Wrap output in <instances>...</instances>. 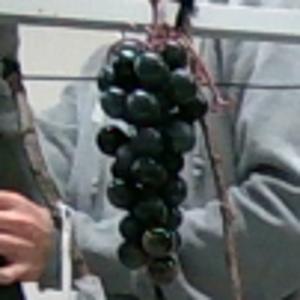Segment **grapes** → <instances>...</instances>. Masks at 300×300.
<instances>
[{"instance_id": "grapes-1", "label": "grapes", "mask_w": 300, "mask_h": 300, "mask_svg": "<svg viewBox=\"0 0 300 300\" xmlns=\"http://www.w3.org/2000/svg\"><path fill=\"white\" fill-rule=\"evenodd\" d=\"M107 62L96 75L103 93L101 109L136 132L104 125L94 135L97 148L116 160L110 168L113 182L106 190L107 201L128 212L118 224L126 240L116 250L118 265L128 275L147 267L151 280L169 286L181 272L171 254L183 244L180 208L190 195L180 175L186 167L184 155L196 146L195 123L209 111L194 76L197 55L177 38L151 48L129 37L111 44Z\"/></svg>"}]
</instances>
